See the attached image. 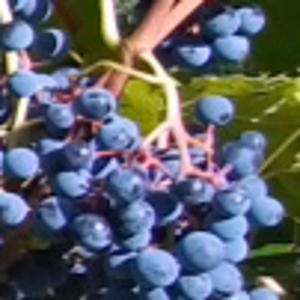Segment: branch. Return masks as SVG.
Masks as SVG:
<instances>
[{
	"mask_svg": "<svg viewBox=\"0 0 300 300\" xmlns=\"http://www.w3.org/2000/svg\"><path fill=\"white\" fill-rule=\"evenodd\" d=\"M206 0H154L144 17L125 37L105 77V88L115 96L124 93L127 79L144 50L153 49L169 32H176L196 15Z\"/></svg>",
	"mask_w": 300,
	"mask_h": 300,
	"instance_id": "branch-1",
	"label": "branch"
}]
</instances>
